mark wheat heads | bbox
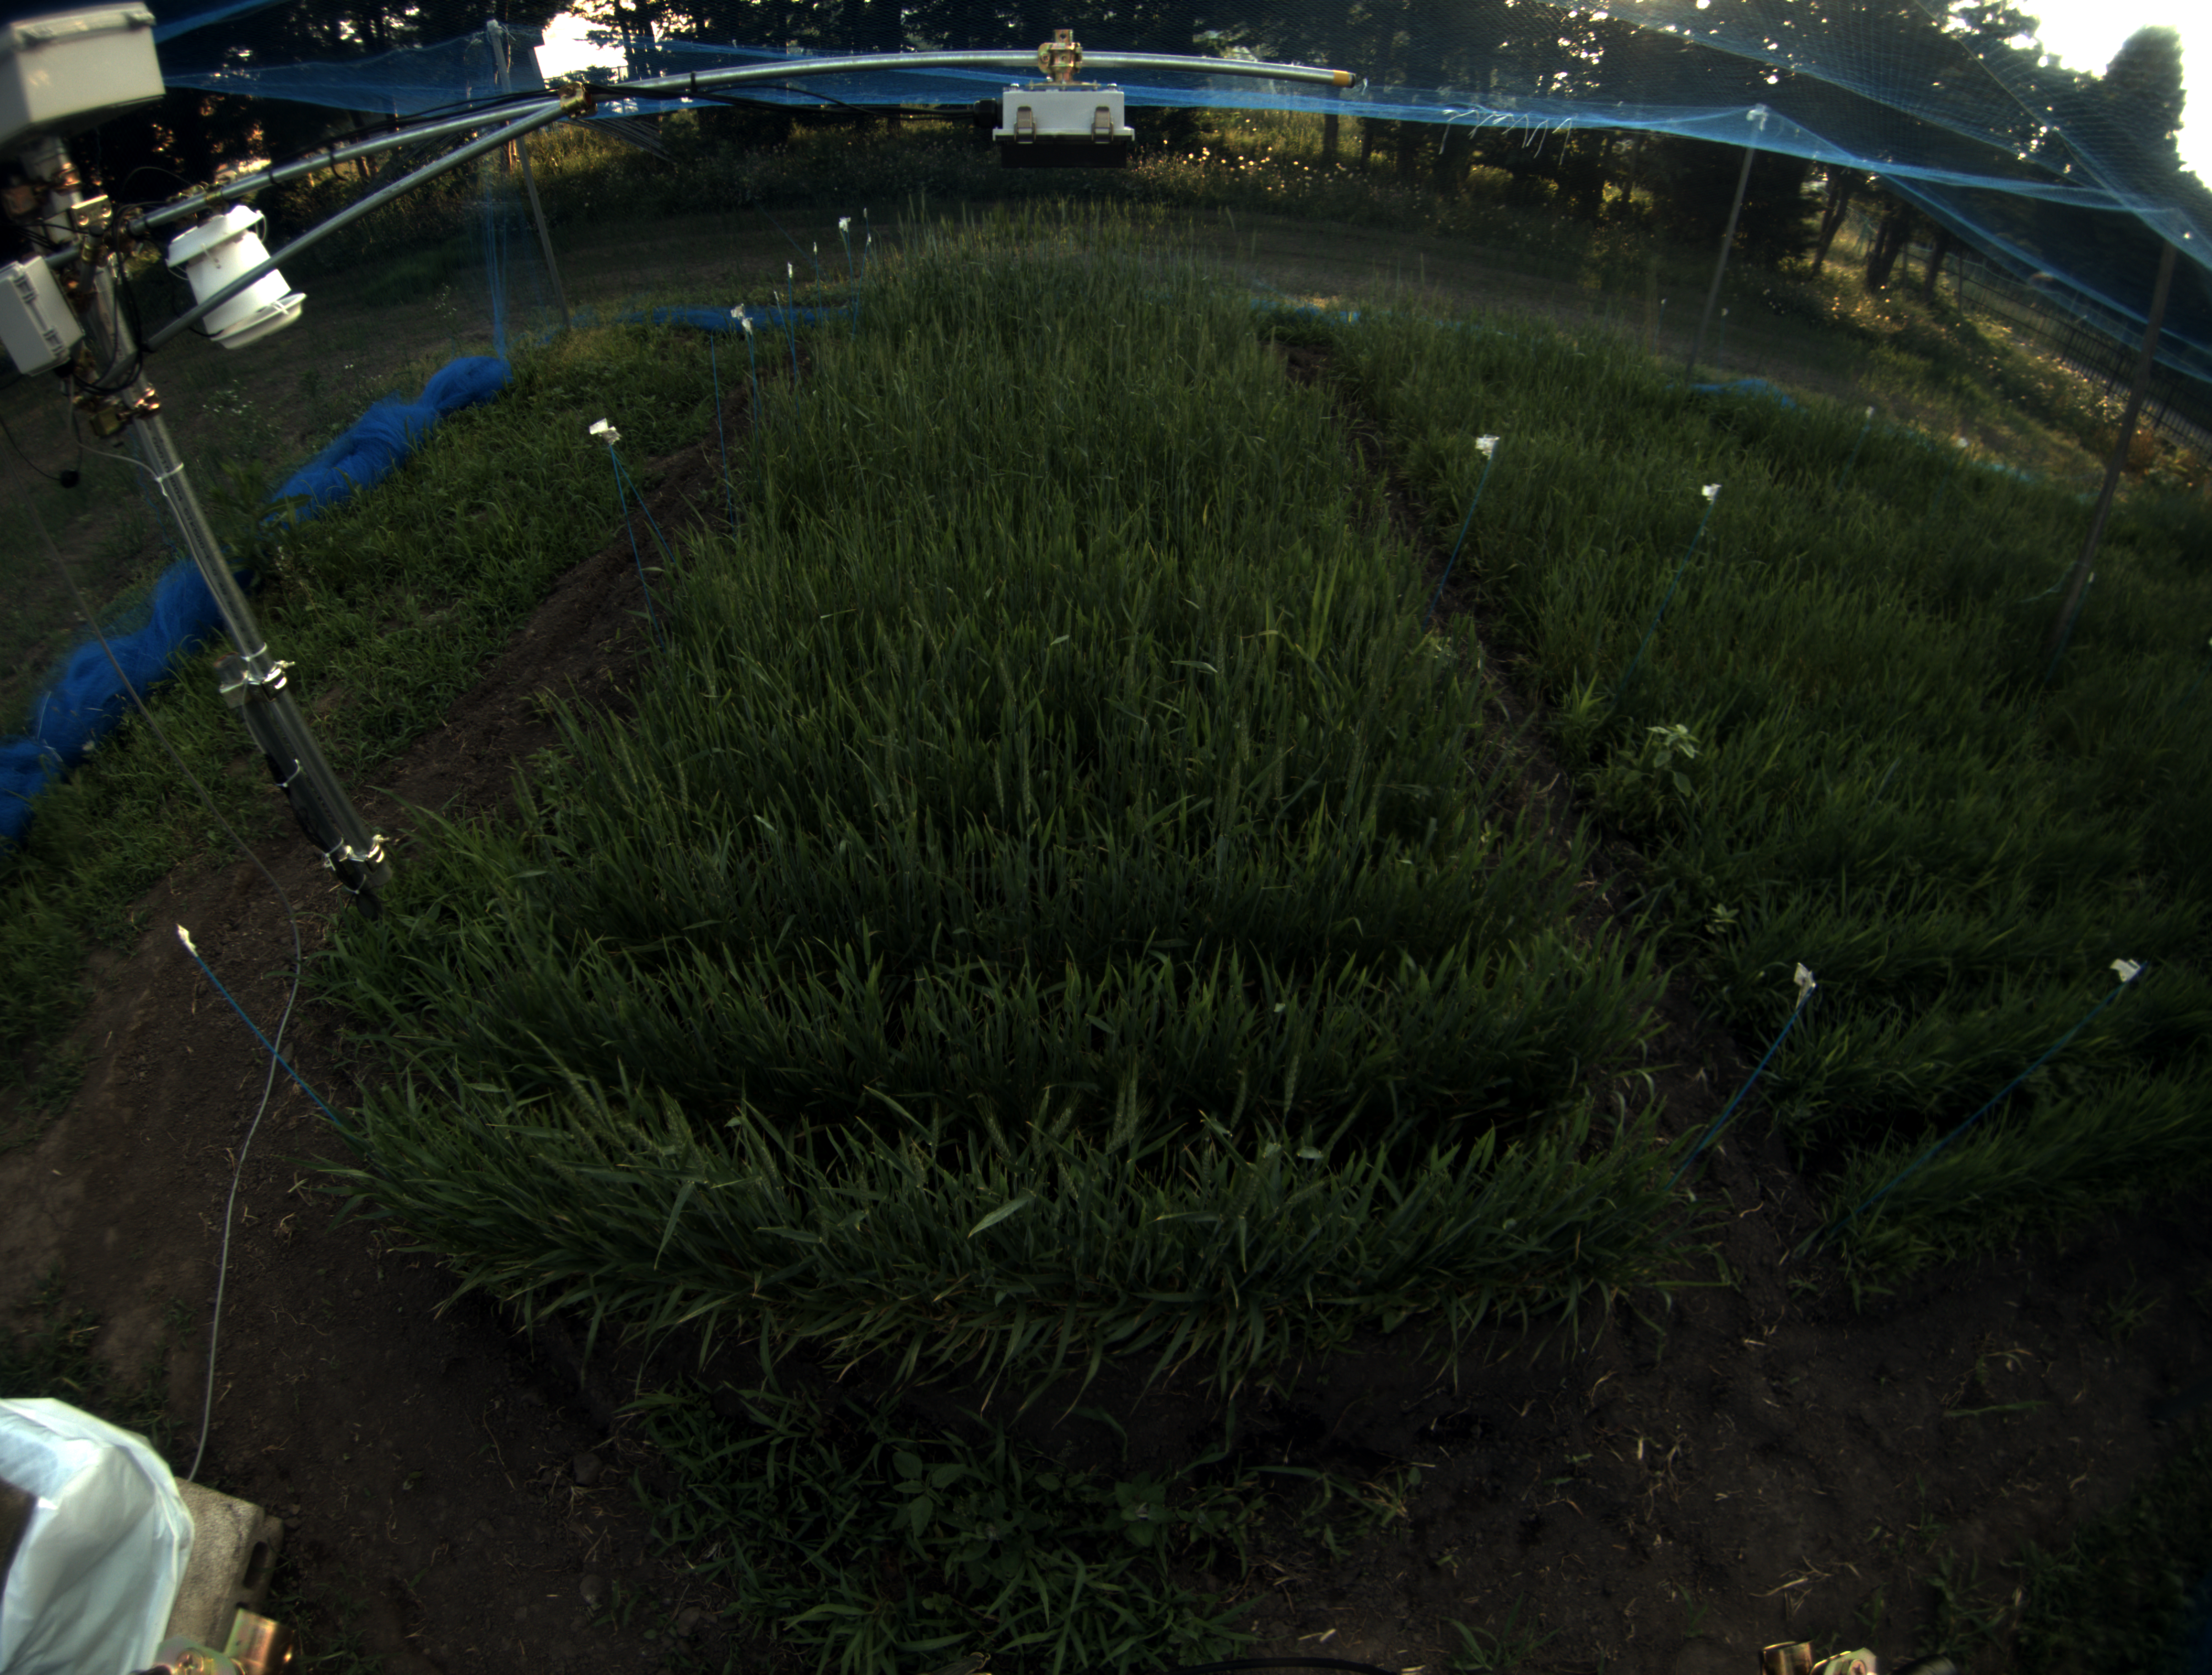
[1286,1181,1326,1205]
[519,771,539,818]
[939,572,946,589]
[610,770,633,808]
[1253,609,1263,640]
[1066,611,1072,636]
[1261,373,1268,405]
[1069,355,1077,378]
[522,795,535,819]
[627,1123,664,1159]
[1283,1056,1300,1114]
[666,1110,683,1158]
[873,312,881,329]
[705,642,716,686]
[721,593,733,627]
[1028,539,1033,569]
[1045,334,1051,354]
[884,755,891,776]
[1390,690,1412,729]
[922,491,938,528]
[897,371,905,394]
[1137,591,1151,625]
[756,752,763,780]
[742,667,752,708]
[727,594,732,611]
[745,1216,755,1233]
[1080,378,1087,400]
[1057,1163,1079,1199]
[1294,623,1302,644]
[493,1102,509,1132]
[1262,573,1272,604]
[1284,970,1294,996]
[762,1172,772,1189]
[1019,689,1025,710]
[882,634,901,677]
[1127,343,1131,371]
[913,1155,928,1184]
[1397,675,1408,682]
[573,863,584,870]
[1176,407,1182,430]
[388,1188,422,1210]
[776,813,781,835]
[1399,615,1417,665]
[749,530,757,566]
[590,1075,609,1109]
[746,1172,758,1200]
[1102,281,1108,302]
[1195,834,1199,855]
[1263,522,1270,558]
[951,309,956,325]
[1416,640,1436,693]
[1145,677,1156,718]
[1105,1116,1138,1154]
[1327,555,1338,591]
[1254,773,1273,815]
[786,680,793,713]
[1276,364,1283,386]
[759,1145,777,1179]
[537,1152,576,1178]
[692,713,705,736]
[1777,552,1794,585]
[562,1066,597,1111]
[384,1122,401,1136]
[1218,633,1224,684]
[1101,519,1107,554]
[1588,1153,1619,1181]
[1241,708,1250,762]
[704,854,724,881]
[1229,1081,1247,1129]
[1382,653,1390,694]
[502,1077,518,1108]
[954,343,959,359]
[572,1121,608,1165]
[565,890,574,907]
[1161,871,1166,891]
[879,362,887,388]
[1228,436,1237,453]
[1051,601,1057,631]
[585,1112,624,1148]
[1123,644,1135,704]
[1256,654,1266,691]
[781,853,788,871]
[753,567,761,596]
[699,659,715,701]
[820,1221,829,1243]
[1036,437,1045,465]
[783,389,793,418]
[1042,1108,1072,1144]
[1299,1022,1308,1045]
[922,414,934,438]
[875,351,880,369]
[1020,341,1024,353]
[832,371,838,391]
[652,773,669,811]
[1528,1192,1541,1216]
[1167,431,1176,450]
[688,1136,706,1173]
[1259,1154,1274,1184]
[768,588,777,618]
[1369,637,1383,678]
[1571,956,1582,989]
[1224,761,1241,835]
[1299,423,1307,442]
[912,427,918,453]
[601,978,610,998]
[420,914,441,949]
[1395,608,1406,638]
[932,554,937,573]
[931,446,937,473]
[1144,1195,1153,1239]
[912,634,921,675]
[1467,698,1486,731]
[984,372,989,388]
[893,771,904,814]
[976,286,983,309]
[1378,708,1393,742]
[966,404,972,427]
[1135,791,1144,837]
[1112,1092,1125,1136]
[961,340,968,363]
[868,382,880,403]
[1854,662,1868,686]
[1346,743,1360,789]
[717,593,725,620]
[888,703,897,731]
[1360,785,1381,831]
[908,369,914,393]
[661,674,673,704]
[1127,517,1140,550]
[653,802,661,826]
[919,350,925,378]
[850,441,861,464]
[1345,803,1361,836]
[987,1116,1012,1160]
[1021,761,1031,817]
[886,734,894,761]
[869,348,874,374]
[560,1104,582,1145]
[1269,468,1277,486]
[804,425,816,447]
[768,556,777,589]
[1198,591,1206,627]
[985,297,989,312]
[489,882,512,924]
[1126,1080,1136,1140]
[1136,498,1148,522]
[1508,704,1540,746]
[1263,442,1271,472]
[1334,441,1341,472]
[859,1174,869,1204]
[948,421,955,454]
[712,543,725,574]
[1243,1175,1259,1207]
[1201,1148,1210,1183]
[906,830,915,864]
[1115,1013,1122,1037]
[899,283,905,302]
[1649,636,1659,657]
[813,341,819,365]
[959,272,964,290]
[736,593,743,619]
[1117,835,1122,857]
[1321,1113,1356,1154]
[617,1120,656,1156]
[1434,660,1452,695]
[901,1149,908,1184]
[906,795,913,818]
[1087,278,1094,296]
[989,1169,999,1188]
[803,577,818,605]
[1173,333,1179,359]
[1028,424,1035,442]
[1312,412,1321,437]
[1360,692,1378,723]
[835,349,840,366]
[711,760,727,790]
[992,759,1004,810]
[453,1115,468,1129]
[1084,347,1093,359]
[1212,372,1227,403]
[974,296,980,316]
[933,844,939,861]
[619,738,637,785]
[875,791,889,820]
[1270,686,1283,721]
[1061,859,1071,886]
[705,538,711,570]
[1508,976,1515,993]
[821,1030,828,1056]
[953,692,959,716]
[1033,1119,1043,1162]
[1343,609,1364,664]
[530,966,550,991]
[1360,640,1377,676]
[931,306,938,325]
[1075,360,1083,387]
[888,358,894,385]
[1213,785,1221,828]
[752,635,760,660]
[910,337,914,353]
[1055,329,1062,357]
[923,351,931,376]
[1341,584,1360,629]
[950,486,956,526]
[1183,456,1186,467]
[540,836,555,859]
[1221,1191,1242,1220]
[1004,555,1009,579]
[1186,303,1191,321]
[1260,862,1269,886]
[845,365,849,383]
[771,498,776,522]
[848,360,854,384]
[709,821,721,849]
[402,1110,431,1137]
[833,399,838,416]
[999,661,1017,704]
[1187,274,1193,298]
[886,337,892,355]
[855,514,861,547]
[935,323,944,348]
[1475,645,1481,666]
[1211,570,1228,632]
[920,615,940,660]
[820,342,825,363]
[931,1118,939,1151]
[678,762,688,811]
[1233,658,1254,701]
[1274,747,1283,798]
[890,424,894,445]
[1235,361,1245,383]
[925,444,930,465]
[1316,379,1320,406]
[948,373,953,397]
[1219,796,1228,833]
[546,926,553,957]
[672,817,680,845]
[649,643,658,668]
